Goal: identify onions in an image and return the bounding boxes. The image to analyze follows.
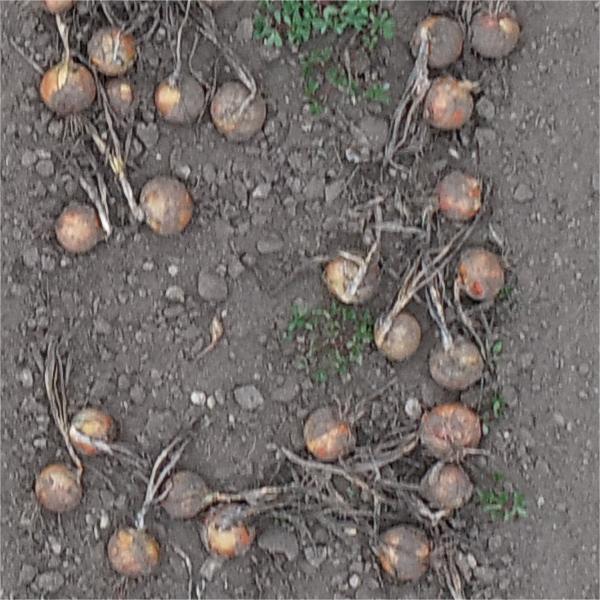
[107,526,161,576]
[471,7,517,55]
[421,79,472,129]
[321,254,372,304]
[203,508,253,557]
[71,405,113,444]
[417,17,462,64]
[34,463,80,511]
[105,78,135,106]
[433,172,481,219]
[375,314,419,359]
[167,469,210,519]
[156,78,208,120]
[419,402,479,455]
[302,406,353,459]
[40,59,95,112]
[422,462,472,509]
[211,81,263,137]
[86,26,136,73]
[42,0,71,12]
[55,203,101,252]
[453,249,506,302]
[431,335,483,389]
[137,175,193,234]
[374,523,430,580]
